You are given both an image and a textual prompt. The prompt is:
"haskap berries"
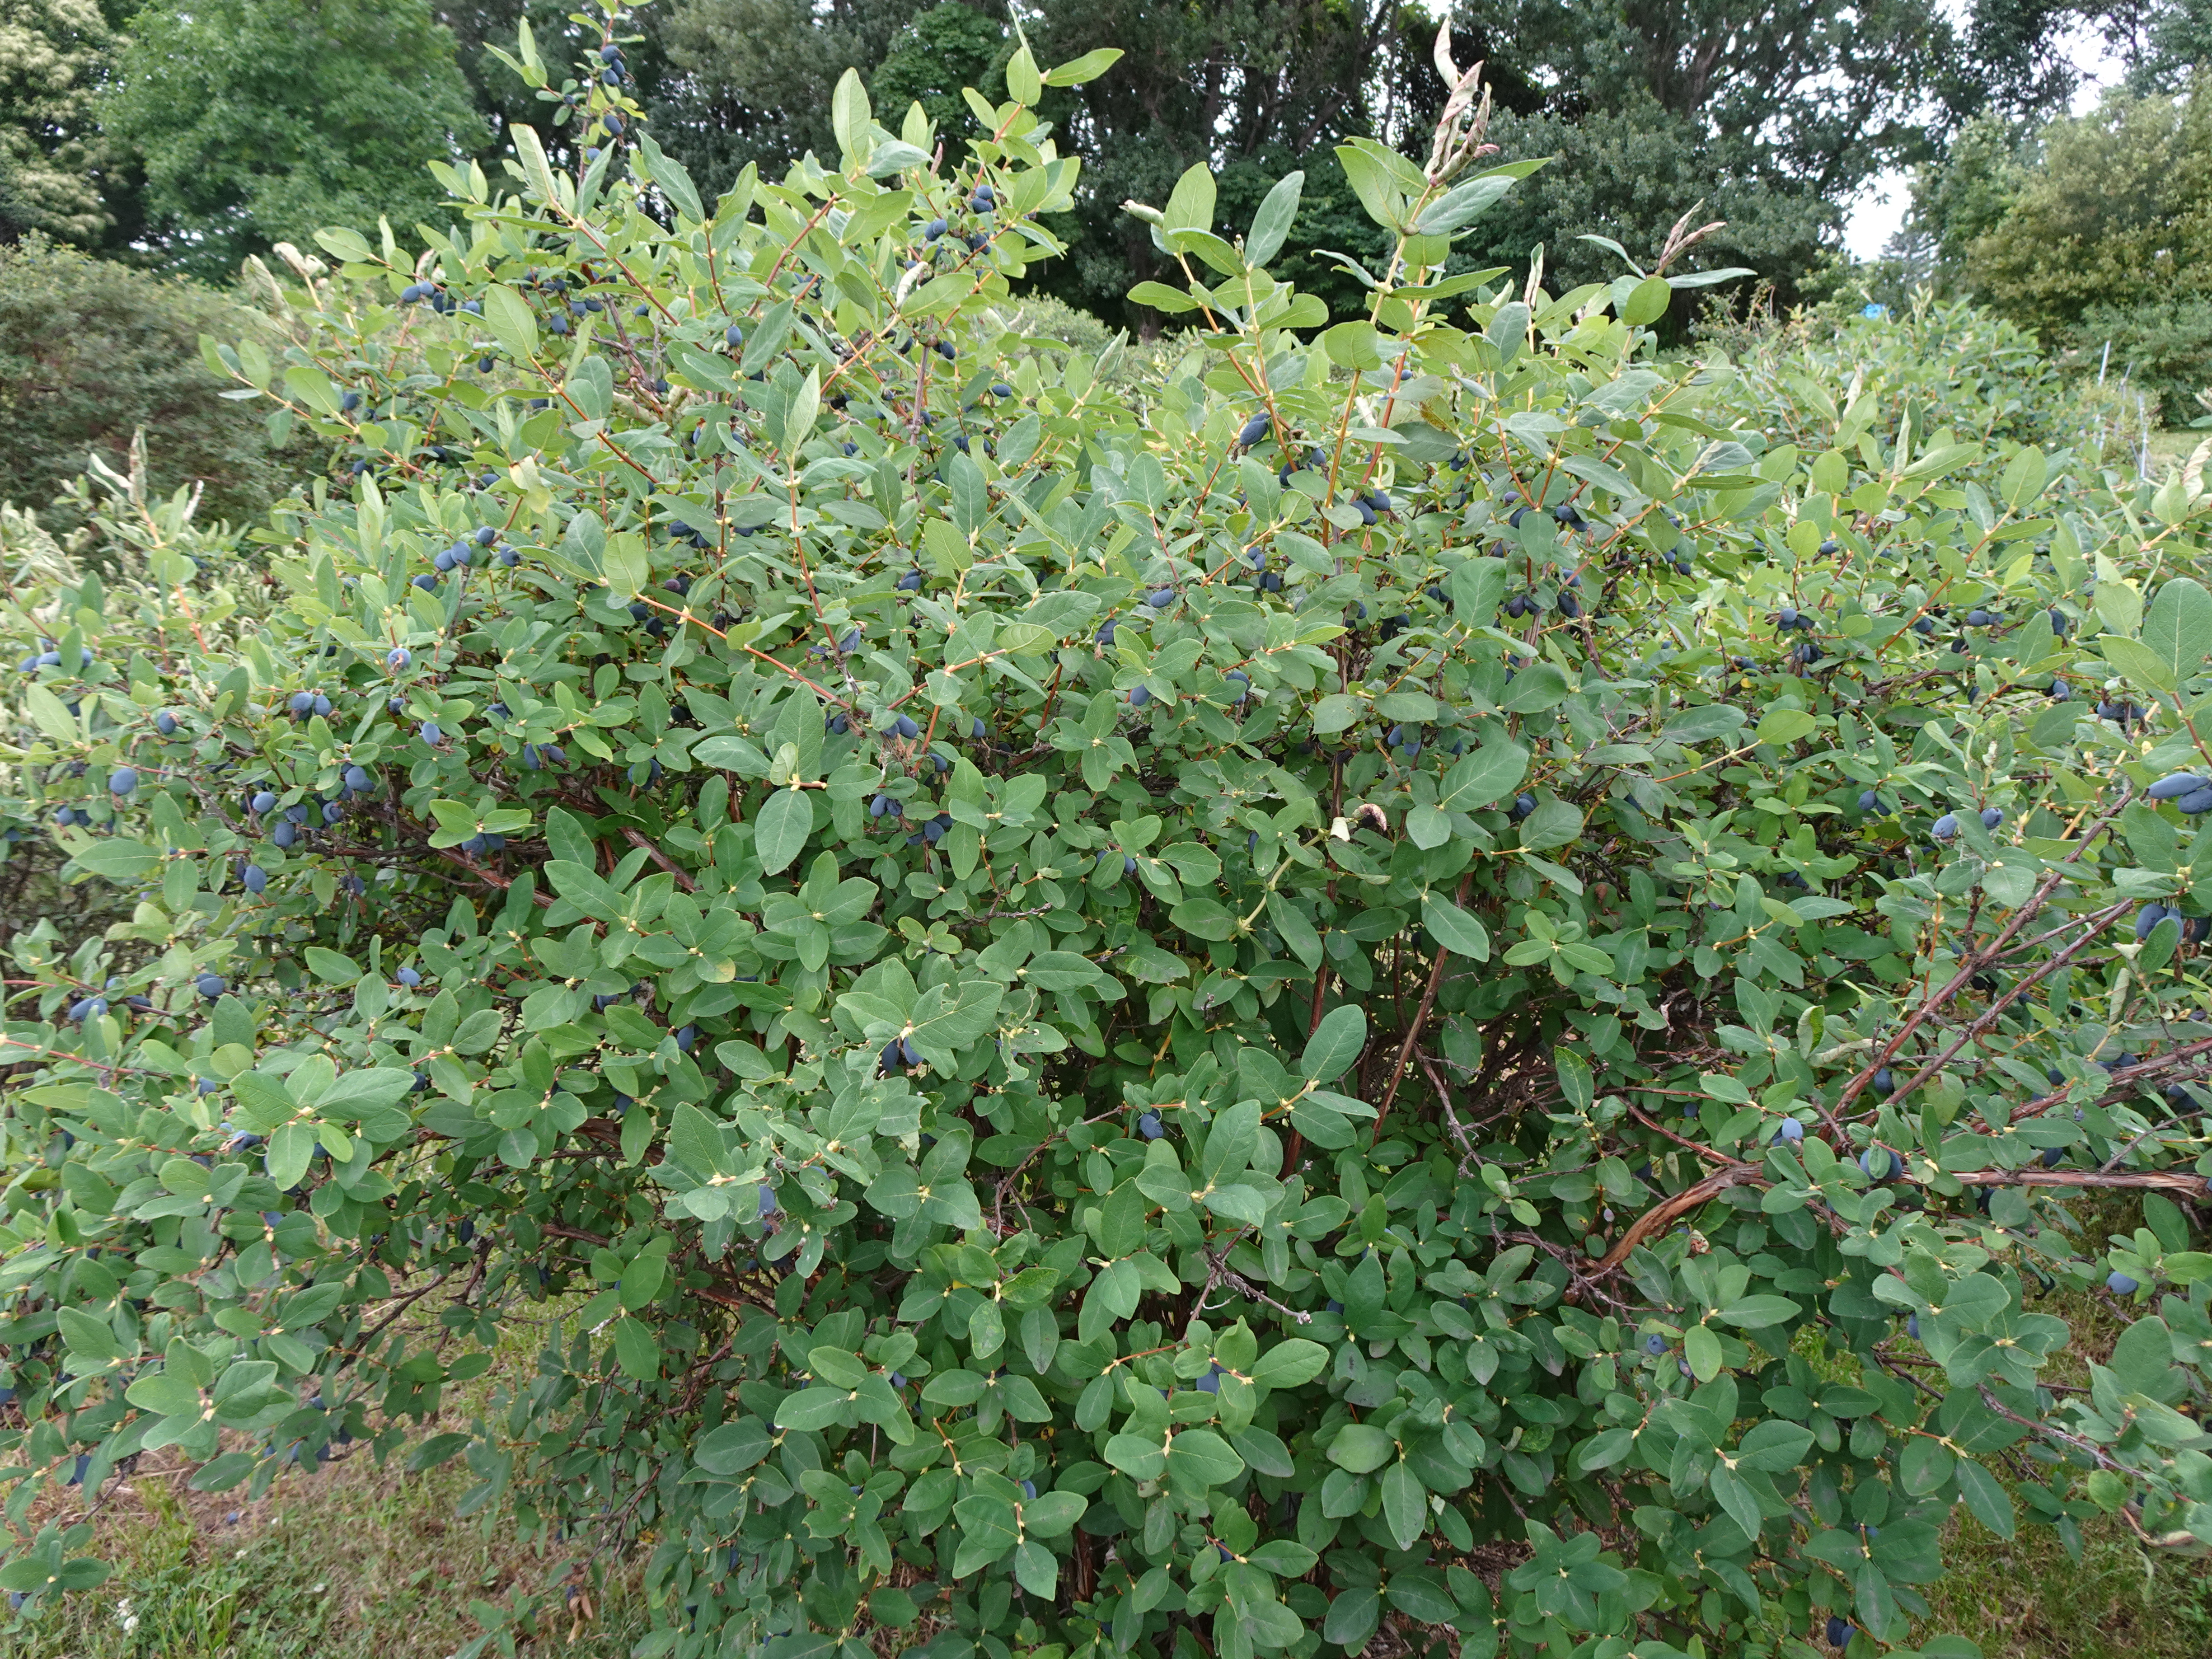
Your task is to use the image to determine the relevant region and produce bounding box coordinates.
[1623,795,1642,812]
[831,394,848,409]
[2097,1061,2117,1071]
[1950,638,1970,652]
[275,821,295,847]
[736,527,754,538]
[609,275,617,283]
[1516,800,1534,817]
[1227,672,1249,687]
[670,520,693,535]
[922,1133,936,1143]
[1921,848,1933,854]
[602,43,619,60]
[1908,1312,1923,1340]
[0,1386,17,1404]
[899,337,911,355]
[87,1247,102,1261]
[555,1530,561,1541]
[904,571,919,580]
[1383,616,1397,627]
[714,614,727,631]
[2167,1085,2185,1098]
[2040,1280,2054,1290]
[2156,916,2183,926]
[960,436,972,450]
[1342,750,1352,759]
[1679,1360,1692,1377]
[1668,518,1680,529]
[1676,563,1690,577]
[1129,685,1149,705]
[1506,668,1514,685]
[2119,1052,2139,1066]
[921,410,931,421]
[802,1380,810,1389]
[952,436,961,450]
[1454,491,1467,509]
[1300,744,1313,755]
[1481,473,1490,483]
[1934,608,1947,616]
[378,466,390,479]
[758,1186,778,1215]
[1411,932,1420,946]
[47,1134,66,1170]
[315,645,338,656]
[292,1440,304,1460]
[402,285,420,302]
[1524,597,1541,616]
[254,780,269,786]
[2042,1147,2063,1167]
[895,712,919,738]
[870,796,887,818]
[970,198,996,214]
[666,579,681,591]
[480,358,494,372]
[207,763,228,774]
[1826,1615,1847,1647]
[696,532,712,549]
[1236,494,1246,505]
[1279,514,1284,521]
[1595,612,1606,618]
[1195,1364,1223,1395]
[1988,614,1996,624]
[965,405,973,413]
[1268,574,1281,592]
[340,762,354,773]
[1402,737,1421,757]
[1400,370,1414,380]
[1803,671,1812,678]
[1883,1152,1903,1181]
[1388,724,1404,747]
[1493,620,1502,628]
[1876,800,1894,816]
[773,1254,790,1267]
[1677,1227,1690,1236]
[1998,613,2004,623]
[341,876,352,889]
[312,793,329,809]
[2067,1004,2083,1017]
[1982,1189,1995,1215]
[1837,608,1842,617]
[476,526,494,547]
[1428,586,1439,599]
[1308,463,1313,470]
[551,316,566,333]
[1650,619,1662,629]
[431,446,448,462]
[323,801,342,822]
[421,721,441,746]
[1558,594,1578,617]
[729,1548,737,1570]
[125,995,152,1013]
[1945,804,1954,813]
[284,1186,299,1198]
[1451,739,1463,754]
[592,263,605,279]
[1797,617,1815,629]
[676,577,689,595]
[396,967,420,986]
[1730,684,1743,695]
[241,792,256,814]
[345,577,357,587]
[614,1281,621,1289]
[631,984,640,994]
[58,1372,73,1382]
[18,656,38,671]
[1269,754,1285,768]
[1450,458,1463,471]
[1494,540,1506,558]
[877,1037,903,1078]
[1886,865,1897,880]
[68,700,82,716]
[1239,421,1268,446]
[1735,658,1759,676]
[2179,791,2210,815]
[933,217,949,235]
[345,766,367,788]
[883,723,902,738]
[2106,1269,2139,1297]
[1519,793,1538,807]
[350,878,364,894]
[1230,693,1247,706]
[1467,448,1475,458]
[2047,1070,2066,1084]
[1349,500,1378,525]
[410,1072,426,1090]
[481,474,497,484]
[913,1403,921,1412]
[2187,917,2211,943]
[1782,1117,1804,1141]
[635,304,649,317]
[926,753,948,772]
[108,768,137,796]
[1416,504,1438,517]
[1948,943,1962,954]
[1505,490,1517,501]
[811,1166,831,1181]
[603,114,623,136]
[1312,447,1327,467]
[1352,600,1367,619]
[846,443,858,452]
[1507,653,1521,667]
[1510,506,1530,529]
[1749,541,1769,552]
[158,713,175,735]
[1248,833,1260,852]
[885,798,904,817]
[2147,773,2210,799]
[266,1446,275,1455]
[2049,611,2065,634]
[766,1423,775,1435]
[134,1298,146,1310]
[1783,871,1798,881]
[877,410,887,420]
[615,1092,633,1116]
[433,294,444,313]
[1968,686,1981,702]
[2000,684,2014,692]
[1647,1334,1665,1356]
[75,810,91,825]
[346,394,357,410]
[1140,1113,1164,1139]
[1149,1109,1161,1119]
[1624,639,1633,644]
[244,865,265,894]
[2093,572,2097,579]
[650,759,661,779]
[585,299,603,312]
[572,300,586,316]
[1395,613,1411,628]
[1523,467,1537,479]
[1024,1481,1036,1499]
[1932,815,1958,838]
[107,977,121,987]
[310,1397,328,1410]
[971,717,986,739]
[1875,1067,1892,1096]
[1355,619,1370,630]
[921,433,928,442]
[353,461,371,473]
[1663,551,1676,563]
[1326,1298,1344,1314]
[190,1156,210,1167]
[1299,519,1312,525]
[541,1267,550,1286]
[450,540,471,569]
[1684,1103,1699,1118]
[1778,621,1797,630]
[57,807,75,825]
[253,792,276,812]
[169,849,177,854]
[1947,1196,1964,1211]
[547,745,566,761]
[294,692,314,710]
[749,369,763,381]
[462,830,489,856]
[287,803,309,822]
[5,827,21,841]
[603,993,621,1003]
[1878,550,1887,558]
[998,743,1012,757]
[530,399,547,408]
[983,439,992,452]
[2033,1093,2044,1100]
[1037,571,1048,582]
[1149,590,1175,607]
[893,1371,908,1387]
[837,624,865,653]
[1847,777,1856,783]
[923,820,947,842]
[75,1455,92,1482]
[487,704,508,720]
[694,427,700,443]
[1247,547,1261,559]
[832,712,850,734]
[597,653,609,667]
[1804,644,1817,664]
[973,231,996,254]
[2050,566,2054,572]
[935,474,943,483]
[1097,850,1109,862]
[2098,697,2125,720]
[221,1123,233,1131]
[1857,790,1876,811]
[338,784,353,800]
[199,1078,217,1094]
[647,480,655,494]
[71,997,93,1021]
[1279,459,1299,485]
[317,1443,330,1461]
[540,1267,546,1280]
[530,1609,536,1617]
[500,546,520,567]
[1865,1525,1880,1542]
[1460,1299,1468,1309]
[1916,617,1932,633]
[62,1132,74,1151]
[1819,539,1841,553]
[1102,1622,1113,1634]
[1773,1137,1787,1146]
[2127,703,2147,719]
[1793,876,1809,889]
[1509,594,1526,619]
[601,68,621,86]
[1439,591,1449,603]
[1981,807,2005,830]
[588,148,597,161]
[40,639,54,652]
[613,59,624,74]
[843,443,852,456]
[1049,650,1060,664]
[1604,1209,1615,1222]
[1569,626,1581,634]
[825,710,835,728]
[1969,976,1988,990]
[487,828,509,850]
[91,998,109,1014]
[2137,903,2165,940]
[1379,625,1392,640]
[885,331,896,343]
[1620,553,1628,561]
[544,282,555,292]
[670,705,686,722]
[2043,687,2056,697]
[197,974,218,981]
[36,652,60,665]
[1362,1248,1368,1258]
[555,279,565,290]
[525,742,539,769]
[420,282,435,295]
[480,1266,486,1278]
[2053,681,2070,701]
[2017,992,2028,1004]
[1661,641,1673,648]
[236,859,246,881]
[907,831,925,846]
[1780,608,1797,621]
[762,1220,771,1231]
[1363,488,1391,510]
[934,815,953,828]
[945,329,957,342]
[565,95,575,105]
[942,341,956,359]
[975,183,998,199]
[358,778,376,792]
[463,301,480,316]
[535,316,541,324]
[1253,413,1269,422]
[901,1034,930,1067]
[1967,611,1989,625]
[384,1193,398,1210]
[412,574,437,590]
[1558,570,1580,585]
[677,1024,694,1053]
[881,392,893,400]
[311,1143,329,1158]
[264,1211,283,1226]
[1094,618,1120,646]
[297,1278,315,1292]
[446,299,457,316]
[389,697,406,713]
[737,977,756,982]
[1566,509,1589,532]
[523,273,537,289]
[82,648,91,668]
[991,385,1012,397]
[1476,536,1484,553]
[642,775,652,791]
[387,648,411,670]
[233,1129,264,1152]
[1555,505,1574,519]
[852,1486,863,1495]
[371,1235,386,1261]
[629,764,636,783]
[334,1426,353,1445]
[67,1478,78,1487]
[1253,554,1266,571]
[1366,455,1372,462]
[199,977,226,996]
[897,577,920,591]
[433,544,459,571]
[728,326,743,346]
[597,995,610,1009]
[1345,618,1356,629]
[1219,1544,1233,1561]
[314,693,332,716]
[2190,1009,2208,1020]
[748,1261,759,1272]
[627,604,648,621]
[1502,604,1508,613]
[1860,1148,1876,1181]
[646,618,663,637]
[1843,1627,1856,1644]
[1259,572,1268,588]
[222,764,235,778]
[1124,857,1138,875]
[763,1636,771,1645]
[566,1585,576,1600]
[687,1605,698,1616]
[657,378,666,391]
[460,1220,474,1245]
[1426,546,1440,555]
[732,433,746,448]
[2179,1095,2199,1108]
[933,342,943,353]
[1360,731,1376,753]
[1637,1162,1653,1181]
[1802,644,1810,662]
